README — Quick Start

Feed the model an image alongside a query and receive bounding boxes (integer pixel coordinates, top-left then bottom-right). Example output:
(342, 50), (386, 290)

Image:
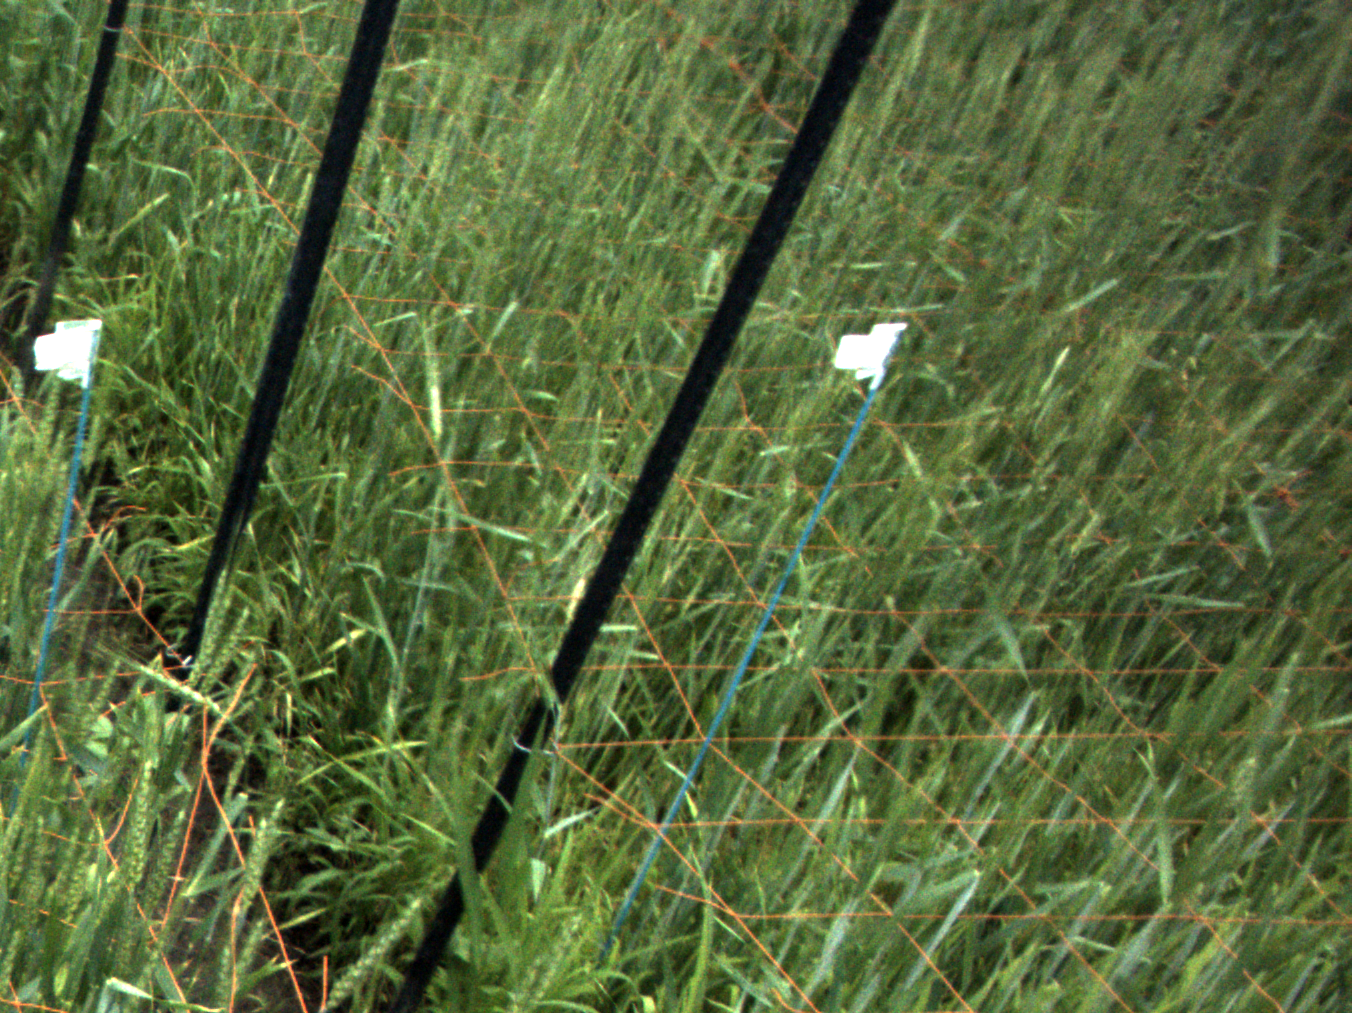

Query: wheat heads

(880, 71), (902, 126)
(0, 809), (22, 942)
(241, 816), (267, 913)
(293, 170), (311, 221)
(40, 428), (65, 500)
(0, 929), (20, 996)
(325, 898), (421, 1007)
(204, 567), (227, 633)
(375, 174), (391, 222)
(117, 941), (165, 1013)
(577, 277), (598, 319)
(1226, 751), (1259, 813)
(190, 585), (235, 683)
(22, 815), (51, 934)
(233, 921), (263, 983)
(202, 606), (250, 693)
(74, 491), (94, 550)
(44, 462), (67, 549)
(17, 514), (39, 565)
(95, 853), (133, 927)
(61, 658), (80, 717)
(77, 657), (120, 746)
(211, 945), (231, 1013)
(11, 818), (35, 883)
(489, 955), (543, 1013)
(259, 796), (285, 873)
(409, 92), (437, 167)
(145, 807), (184, 912)
(32, 378), (62, 454)
(126, 755), (153, 890)
(109, 894), (138, 980)
(562, 576), (585, 626)
(66, 828), (96, 922)
(672, 137), (698, 185)
(525, 913), (583, 1013)
(9, 361), (24, 413)
(83, 414), (99, 477)
(429, 114), (454, 174)
(427, 384), (444, 439)
(73, 668), (99, 722)
(0, 471), (9, 557)
(55, 843), (77, 906)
